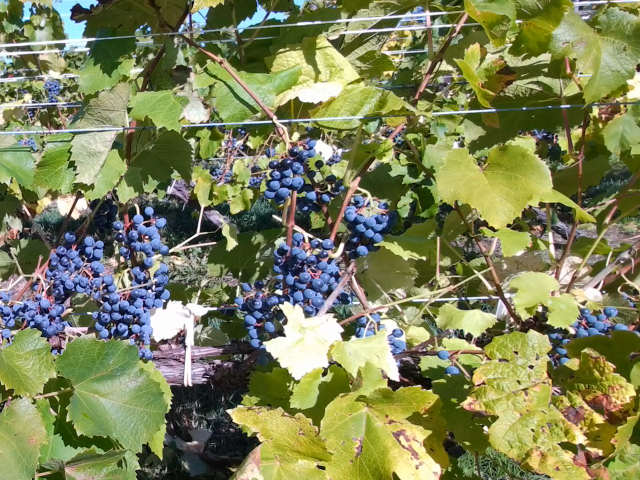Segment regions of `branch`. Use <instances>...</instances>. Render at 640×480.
Instances as JSON below:
<instances>
[{
	"mask_svg": "<svg viewBox=\"0 0 640 480\" xmlns=\"http://www.w3.org/2000/svg\"><path fill=\"white\" fill-rule=\"evenodd\" d=\"M165 51H166V48H165V47H164V48H161V49H160V51H159V52H157V53L154 55V58L152 59V62L150 63V65H149V67H148V69H147V72H146V75H145V79H144V81H143L142 85L140 86V90H141V91H144V90L146 89V87L148 86L149 81H150V78H151V74H152V72H153V70H154V67L156 66V64H157V62H158V60H159V58L163 56V54L165 53Z\"/></svg>",
	"mask_w": 640,
	"mask_h": 480,
	"instance_id": "10",
	"label": "branch"
},
{
	"mask_svg": "<svg viewBox=\"0 0 640 480\" xmlns=\"http://www.w3.org/2000/svg\"><path fill=\"white\" fill-rule=\"evenodd\" d=\"M588 113L589 109L585 108L583 110V121H582V132L579 146V158H578V182L576 187L577 194V205H582V185H583V161H584V148L586 142L587 135V126H588Z\"/></svg>",
	"mask_w": 640,
	"mask_h": 480,
	"instance_id": "7",
	"label": "branch"
},
{
	"mask_svg": "<svg viewBox=\"0 0 640 480\" xmlns=\"http://www.w3.org/2000/svg\"><path fill=\"white\" fill-rule=\"evenodd\" d=\"M466 17H467L466 13H463V15L460 16V18L458 19V21L456 23L455 28L451 31V34L447 37V39L442 44V46L439 49V51L433 57V60L431 61V64H430V66H429V68L427 70V73H426L424 79L422 80L421 84L419 85V87L417 89V92L412 96V105L413 106L417 105V99L421 96L425 86L427 85L428 81L430 80V77L432 75V72L434 71L436 63L438 62L439 58L443 55V53L445 52L447 47L450 45V43L452 42L453 38L459 32V30L461 28V25L463 24V22H464Z\"/></svg>",
	"mask_w": 640,
	"mask_h": 480,
	"instance_id": "5",
	"label": "branch"
},
{
	"mask_svg": "<svg viewBox=\"0 0 640 480\" xmlns=\"http://www.w3.org/2000/svg\"><path fill=\"white\" fill-rule=\"evenodd\" d=\"M188 14H189V10H188V9H185V10L182 12L181 17H180L179 21H178V22H177V24H176V28H175L173 25H171V24H170L166 19H162V20H161V23H162V24H163L167 29H169L170 31H178V30H180V29H181V27H182V25H183V23H184V21H185V19H186V17H187V15H188Z\"/></svg>",
	"mask_w": 640,
	"mask_h": 480,
	"instance_id": "11",
	"label": "branch"
},
{
	"mask_svg": "<svg viewBox=\"0 0 640 480\" xmlns=\"http://www.w3.org/2000/svg\"><path fill=\"white\" fill-rule=\"evenodd\" d=\"M180 40L186 41L188 45L193 46L194 48H196L197 50L203 52L206 56H208L211 59L216 60L219 65L221 66V68L233 79H235L236 81L240 82L239 86L248 93L249 97L252 98V100L259 105L262 108V111L264 114H266L269 118H273V116L275 115L274 113L271 112V109L267 107V105L259 100V97L257 96V94L246 84V82L244 80L241 79L240 76H238L236 73H234L227 65L226 63L223 61V59L218 56L217 54H213L212 52H210L207 48L203 47L200 44H197L195 41L190 40L187 36H179Z\"/></svg>",
	"mask_w": 640,
	"mask_h": 480,
	"instance_id": "3",
	"label": "branch"
},
{
	"mask_svg": "<svg viewBox=\"0 0 640 480\" xmlns=\"http://www.w3.org/2000/svg\"><path fill=\"white\" fill-rule=\"evenodd\" d=\"M447 291L446 287L434 290V291H430V292H422V293H418V294H414L411 296H407L405 298H401L392 302H388V303H378L375 304L374 306H370L366 309H363L355 314L349 315L348 317H345L344 319H341L338 321L339 325H344L347 324L348 322H350L351 320L357 319L359 317H362L365 314L371 313L373 311H376L377 309L379 310H385L386 308H390V307H394L403 303H407L410 301H413L417 298H424V297H432V296H436V295H440L443 294Z\"/></svg>",
	"mask_w": 640,
	"mask_h": 480,
	"instance_id": "4",
	"label": "branch"
},
{
	"mask_svg": "<svg viewBox=\"0 0 640 480\" xmlns=\"http://www.w3.org/2000/svg\"><path fill=\"white\" fill-rule=\"evenodd\" d=\"M134 133H135V130L129 131V134H128L127 140H126V144H125V158H126L127 162L131 161L130 147H131L132 139L134 137Z\"/></svg>",
	"mask_w": 640,
	"mask_h": 480,
	"instance_id": "12",
	"label": "branch"
},
{
	"mask_svg": "<svg viewBox=\"0 0 640 480\" xmlns=\"http://www.w3.org/2000/svg\"><path fill=\"white\" fill-rule=\"evenodd\" d=\"M577 228H578V221L574 220L572 228H571V231H570V234H569L568 241H567L566 246H565V250L562 253V255H561V257H560V259L558 261V268H557V270L555 272V278L556 279L560 278V275H561L562 270H563V264H564L567 256L570 253V248H571V245L573 244V240H574V236H575Z\"/></svg>",
	"mask_w": 640,
	"mask_h": 480,
	"instance_id": "8",
	"label": "branch"
},
{
	"mask_svg": "<svg viewBox=\"0 0 640 480\" xmlns=\"http://www.w3.org/2000/svg\"><path fill=\"white\" fill-rule=\"evenodd\" d=\"M296 198H297V192L293 191L291 195V208L289 213V221L286 224L285 241L287 246H290L292 243L294 216L296 211Z\"/></svg>",
	"mask_w": 640,
	"mask_h": 480,
	"instance_id": "9",
	"label": "branch"
},
{
	"mask_svg": "<svg viewBox=\"0 0 640 480\" xmlns=\"http://www.w3.org/2000/svg\"><path fill=\"white\" fill-rule=\"evenodd\" d=\"M455 211L457 212V214L459 215V219L461 220L463 226L466 228V230L470 233V235L473 237V239L475 240L481 254L482 257L484 259V263L486 264V268L488 269V271L490 272V274L494 277V280L497 284L498 287V292L501 298V301L503 302V305L508 309L509 313L518 321L520 326H524L525 322L523 321V318L518 315V313L513 309V307L511 306V304L508 302L504 290H503V285L501 282V279L499 277V275L497 274V272L494 270V268L491 265V262L489 260L488 254L486 252V249L484 248L482 241L480 240V238L478 237V235L475 233V231L473 230V228L468 224L466 218H465V213L461 210L460 207H456Z\"/></svg>",
	"mask_w": 640,
	"mask_h": 480,
	"instance_id": "2",
	"label": "branch"
},
{
	"mask_svg": "<svg viewBox=\"0 0 640 480\" xmlns=\"http://www.w3.org/2000/svg\"><path fill=\"white\" fill-rule=\"evenodd\" d=\"M376 160L375 156H371L370 159L365 163V165L363 166V168L360 170L358 176L355 178V180L352 182L349 190L347 191L343 202L339 208V211L337 213L336 219L332 225V229L330 231V239L334 240L335 239V234L337 231V228L341 222L343 213L347 207V204L350 200L351 195L353 194L355 187L359 184V182L361 181V179L364 177V174L367 172V170L370 168V166L374 163V161Z\"/></svg>",
	"mask_w": 640,
	"mask_h": 480,
	"instance_id": "6",
	"label": "branch"
},
{
	"mask_svg": "<svg viewBox=\"0 0 640 480\" xmlns=\"http://www.w3.org/2000/svg\"><path fill=\"white\" fill-rule=\"evenodd\" d=\"M640 178V171H638L636 173L635 176H633L631 178V180L627 183V185L623 188V190L620 192V194L618 195L617 199L615 200V202L613 203V205L611 206V208L609 209V211L607 212L604 220L602 221V225L599 231V234L597 235V237L593 240L592 244L590 245V248L587 250V252L585 253V256L583 257L581 263L579 264V266L576 268L575 272L572 274L571 279L569 280L568 283V287L565 290L566 294H569L572 292L574 283L577 279V277L579 276L580 272L583 270V268L585 267L586 263L588 262L591 254L594 252L597 244L603 239L607 224L609 223L610 218L612 217V215L614 214V211L616 210V208L620 205L621 201L623 200V198L625 197L626 193L630 190V188L634 185V183Z\"/></svg>",
	"mask_w": 640,
	"mask_h": 480,
	"instance_id": "1",
	"label": "branch"
},
{
	"mask_svg": "<svg viewBox=\"0 0 640 480\" xmlns=\"http://www.w3.org/2000/svg\"><path fill=\"white\" fill-rule=\"evenodd\" d=\"M273 125L276 127V129H277V130H278V132L280 133L281 137L283 138V142H284V144H286V143H285V140H284V135H285V133L283 132V130H282L280 127H278L277 125H275L274 123H273Z\"/></svg>",
	"mask_w": 640,
	"mask_h": 480,
	"instance_id": "14",
	"label": "branch"
},
{
	"mask_svg": "<svg viewBox=\"0 0 640 480\" xmlns=\"http://www.w3.org/2000/svg\"><path fill=\"white\" fill-rule=\"evenodd\" d=\"M404 127V123L400 122L396 125V127L392 130L390 138L391 139H395L396 138V134L400 131L401 128Z\"/></svg>",
	"mask_w": 640,
	"mask_h": 480,
	"instance_id": "13",
	"label": "branch"
}]
</instances>
